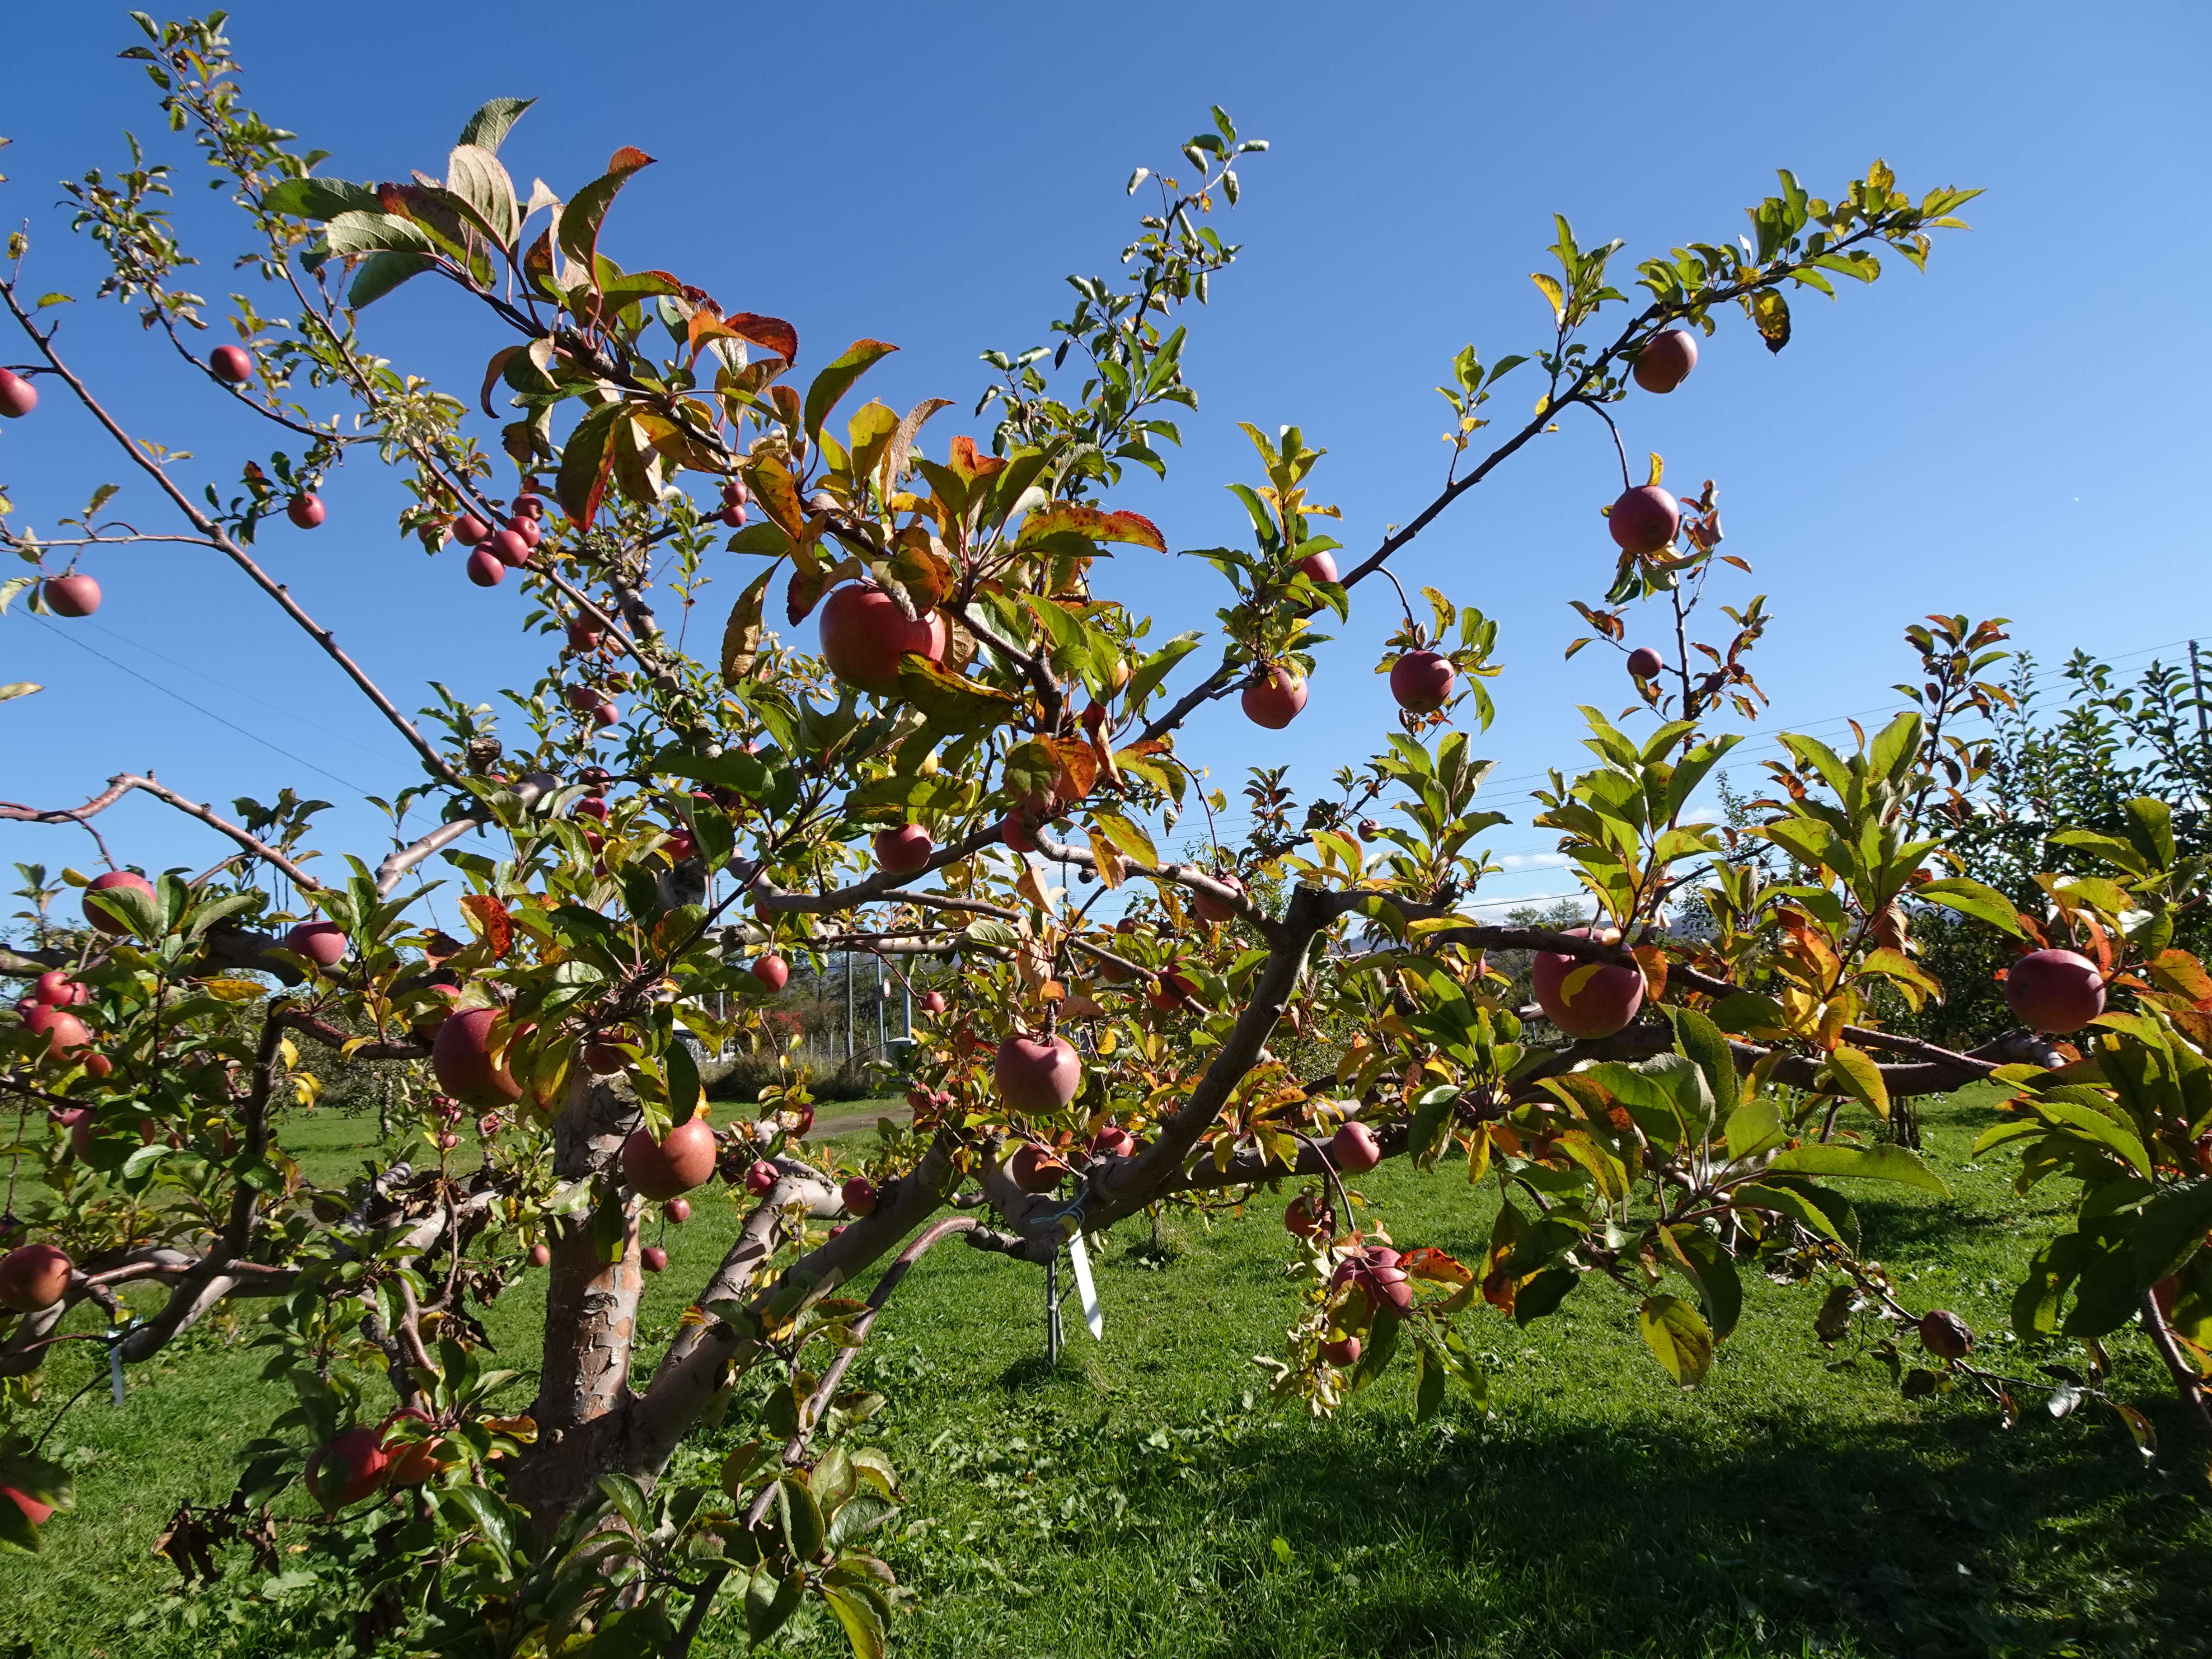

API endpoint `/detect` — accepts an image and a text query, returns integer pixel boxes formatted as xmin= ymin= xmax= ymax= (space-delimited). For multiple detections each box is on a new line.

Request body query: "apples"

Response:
xmin=819 ymin=584 xmax=945 ymax=697
xmin=2005 ymin=949 xmax=2105 ymax=1034
xmin=607 ymin=671 xmax=631 ymax=693
xmin=438 ymin=1128 xmax=456 ymax=1147
xmin=492 ymin=530 xmax=528 ymax=567
xmin=727 ymin=792 xmax=757 ymax=825
xmin=584 ymin=1031 xmax=629 ymax=1075
xmin=75 ymin=1040 xmax=113 ymax=1078
xmin=579 ymin=768 xmax=611 ymax=798
xmin=0 ymin=1244 xmax=72 ymax=1313
xmin=1919 ymin=1309 xmax=1973 ymax=1359
xmin=1503 ymin=1103 xmax=1555 ymax=1142
xmin=485 ymin=531 xmax=501 ymax=542
xmin=1319 ymin=1335 xmax=1361 ymax=1367
xmin=621 ymin=1115 xmax=716 ymax=1201
xmin=506 ymin=516 xmax=540 ymax=548
xmin=722 ymin=505 xmax=746 ymax=527
xmin=418 ymin=520 xmax=452 ymax=544
xmin=1335 ymin=957 xmax=1360 ymax=975
xmin=431 ymin=1097 xmax=455 ymax=1114
xmin=45 ymin=1106 xmax=84 ymax=1129
xmin=287 ymin=493 xmax=325 ymax=529
xmin=287 ymin=920 xmax=346 ymax=968
xmin=1116 ymin=918 xmax=1135 ymax=934
xmin=1357 ymin=819 xmax=1381 ymax=843
xmin=15 ymin=996 xmax=42 ymax=1018
xmin=755 ymin=900 xmax=786 ymax=925
xmin=1531 ymin=927 xmax=1644 ymax=1039
xmin=1002 ymin=816 xmax=1045 ymax=852
xmin=82 ymin=871 xmax=156 ymax=936
xmin=914 ymin=1088 xmax=941 ymax=1113
xmin=723 ymin=482 xmax=747 ymax=506
xmin=1283 ymin=550 xmax=1338 ymax=602
xmin=919 ymin=992 xmax=945 ymax=1015
xmin=994 ymin=1034 xmax=1081 ymax=1115
xmin=641 ymin=1247 xmax=667 ymax=1272
xmin=37 ymin=1012 xmax=86 ymax=1062
xmin=828 ymin=1225 xmax=848 ymax=1240
xmin=0 ymin=1485 xmax=53 ymax=1526
xmin=210 ymin=345 xmax=251 ymax=383
xmin=305 ymin=1427 xmax=388 ymax=1506
xmin=746 ymin=1161 xmax=779 ymax=1197
xmin=776 ymin=1102 xmax=814 ymax=1137
xmin=466 ymin=549 xmax=504 ymax=586
xmin=1007 ymin=791 xmax=1040 ymax=823
xmin=1530 ymin=1129 xmax=1570 ymax=1161
xmin=0 ymin=367 xmax=37 ymax=418
xmin=1284 ymin=1197 xmax=1322 ymax=1238
xmin=912 ymin=1110 xmax=939 ymax=1131
xmin=1627 ymin=647 xmax=1662 ymax=680
xmin=35 ymin=971 xmax=85 ymax=1007
xmin=516 ymin=547 xmax=536 ymax=569
xmin=1390 ymin=650 xmax=1455 ymax=714
xmin=875 ymin=823 xmax=932 ymax=875
xmin=139 ymin=1117 xmax=155 ymax=1146
xmin=1081 ymin=1127 xmax=1136 ymax=1161
xmin=719 ymin=1155 xmax=745 ymax=1184
xmin=43 ymin=574 xmax=101 ymax=617
xmin=1241 ymin=664 xmax=1307 ymax=729
xmin=907 ymin=1082 xmax=929 ymax=1108
xmin=526 ymin=1244 xmax=550 ymax=1268
xmin=0 ymin=1224 xmax=26 ymax=1250
xmin=377 ymin=1408 xmax=451 ymax=1484
xmin=490 ymin=774 xmax=507 ymax=783
xmin=1632 ymin=329 xmax=1698 ymax=394
xmin=472 ymin=541 xmax=495 ymax=553
xmin=679 ymin=791 xmax=712 ymax=824
xmin=445 ymin=1107 xmax=461 ymax=1124
xmin=1168 ymin=955 xmax=1202 ymax=994
xmin=1448 ymin=950 xmax=1486 ymax=980
xmin=578 ymin=604 xmax=609 ymax=633
xmin=511 ymin=494 xmax=543 ymax=522
xmin=1012 ymin=1143 xmax=1064 ymax=1193
xmin=1100 ymin=958 xmax=1130 ymax=984
xmin=523 ymin=478 xmax=538 ymax=494
xmin=568 ymin=622 xmax=598 ymax=652
xmin=575 ymin=796 xmax=608 ymax=826
xmin=1146 ymin=970 xmax=1189 ymax=1011
xmin=752 ymin=955 xmax=788 ymax=994
xmin=2153 ymin=1274 xmax=2178 ymax=1322
xmin=417 ymin=984 xmax=461 ymax=1039
xmin=71 ymin=1109 xmax=110 ymax=1166
xmin=482 ymin=1114 xmax=500 ymax=1134
xmin=1193 ymin=874 xmax=1244 ymax=921
xmin=452 ymin=514 xmax=488 ymax=546
xmin=433 ymin=1008 xmax=540 ymax=1108
xmin=593 ymin=703 xmax=618 ymax=727
xmin=937 ymin=1090 xmax=951 ymax=1112
xmin=841 ymin=1176 xmax=877 ymax=1216
xmin=617 ymin=1025 xmax=639 ymax=1063
xmin=570 ymin=688 xmax=598 ymax=711
xmin=737 ymin=742 xmax=761 ymax=754
xmin=583 ymin=830 xmax=607 ymax=855
xmin=663 ymin=828 xmax=695 ymax=861
xmin=1193 ymin=914 xmax=1210 ymax=936
xmin=664 ymin=1198 xmax=690 ymax=1224
xmin=1609 ymin=485 xmax=1679 ymax=554
xmin=1331 ymin=1246 xmax=1412 ymax=1328
xmin=20 ymin=1005 xmax=53 ymax=1035
xmin=1332 ymin=1121 xmax=1381 ymax=1174
xmin=594 ymin=856 xmax=608 ymax=878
